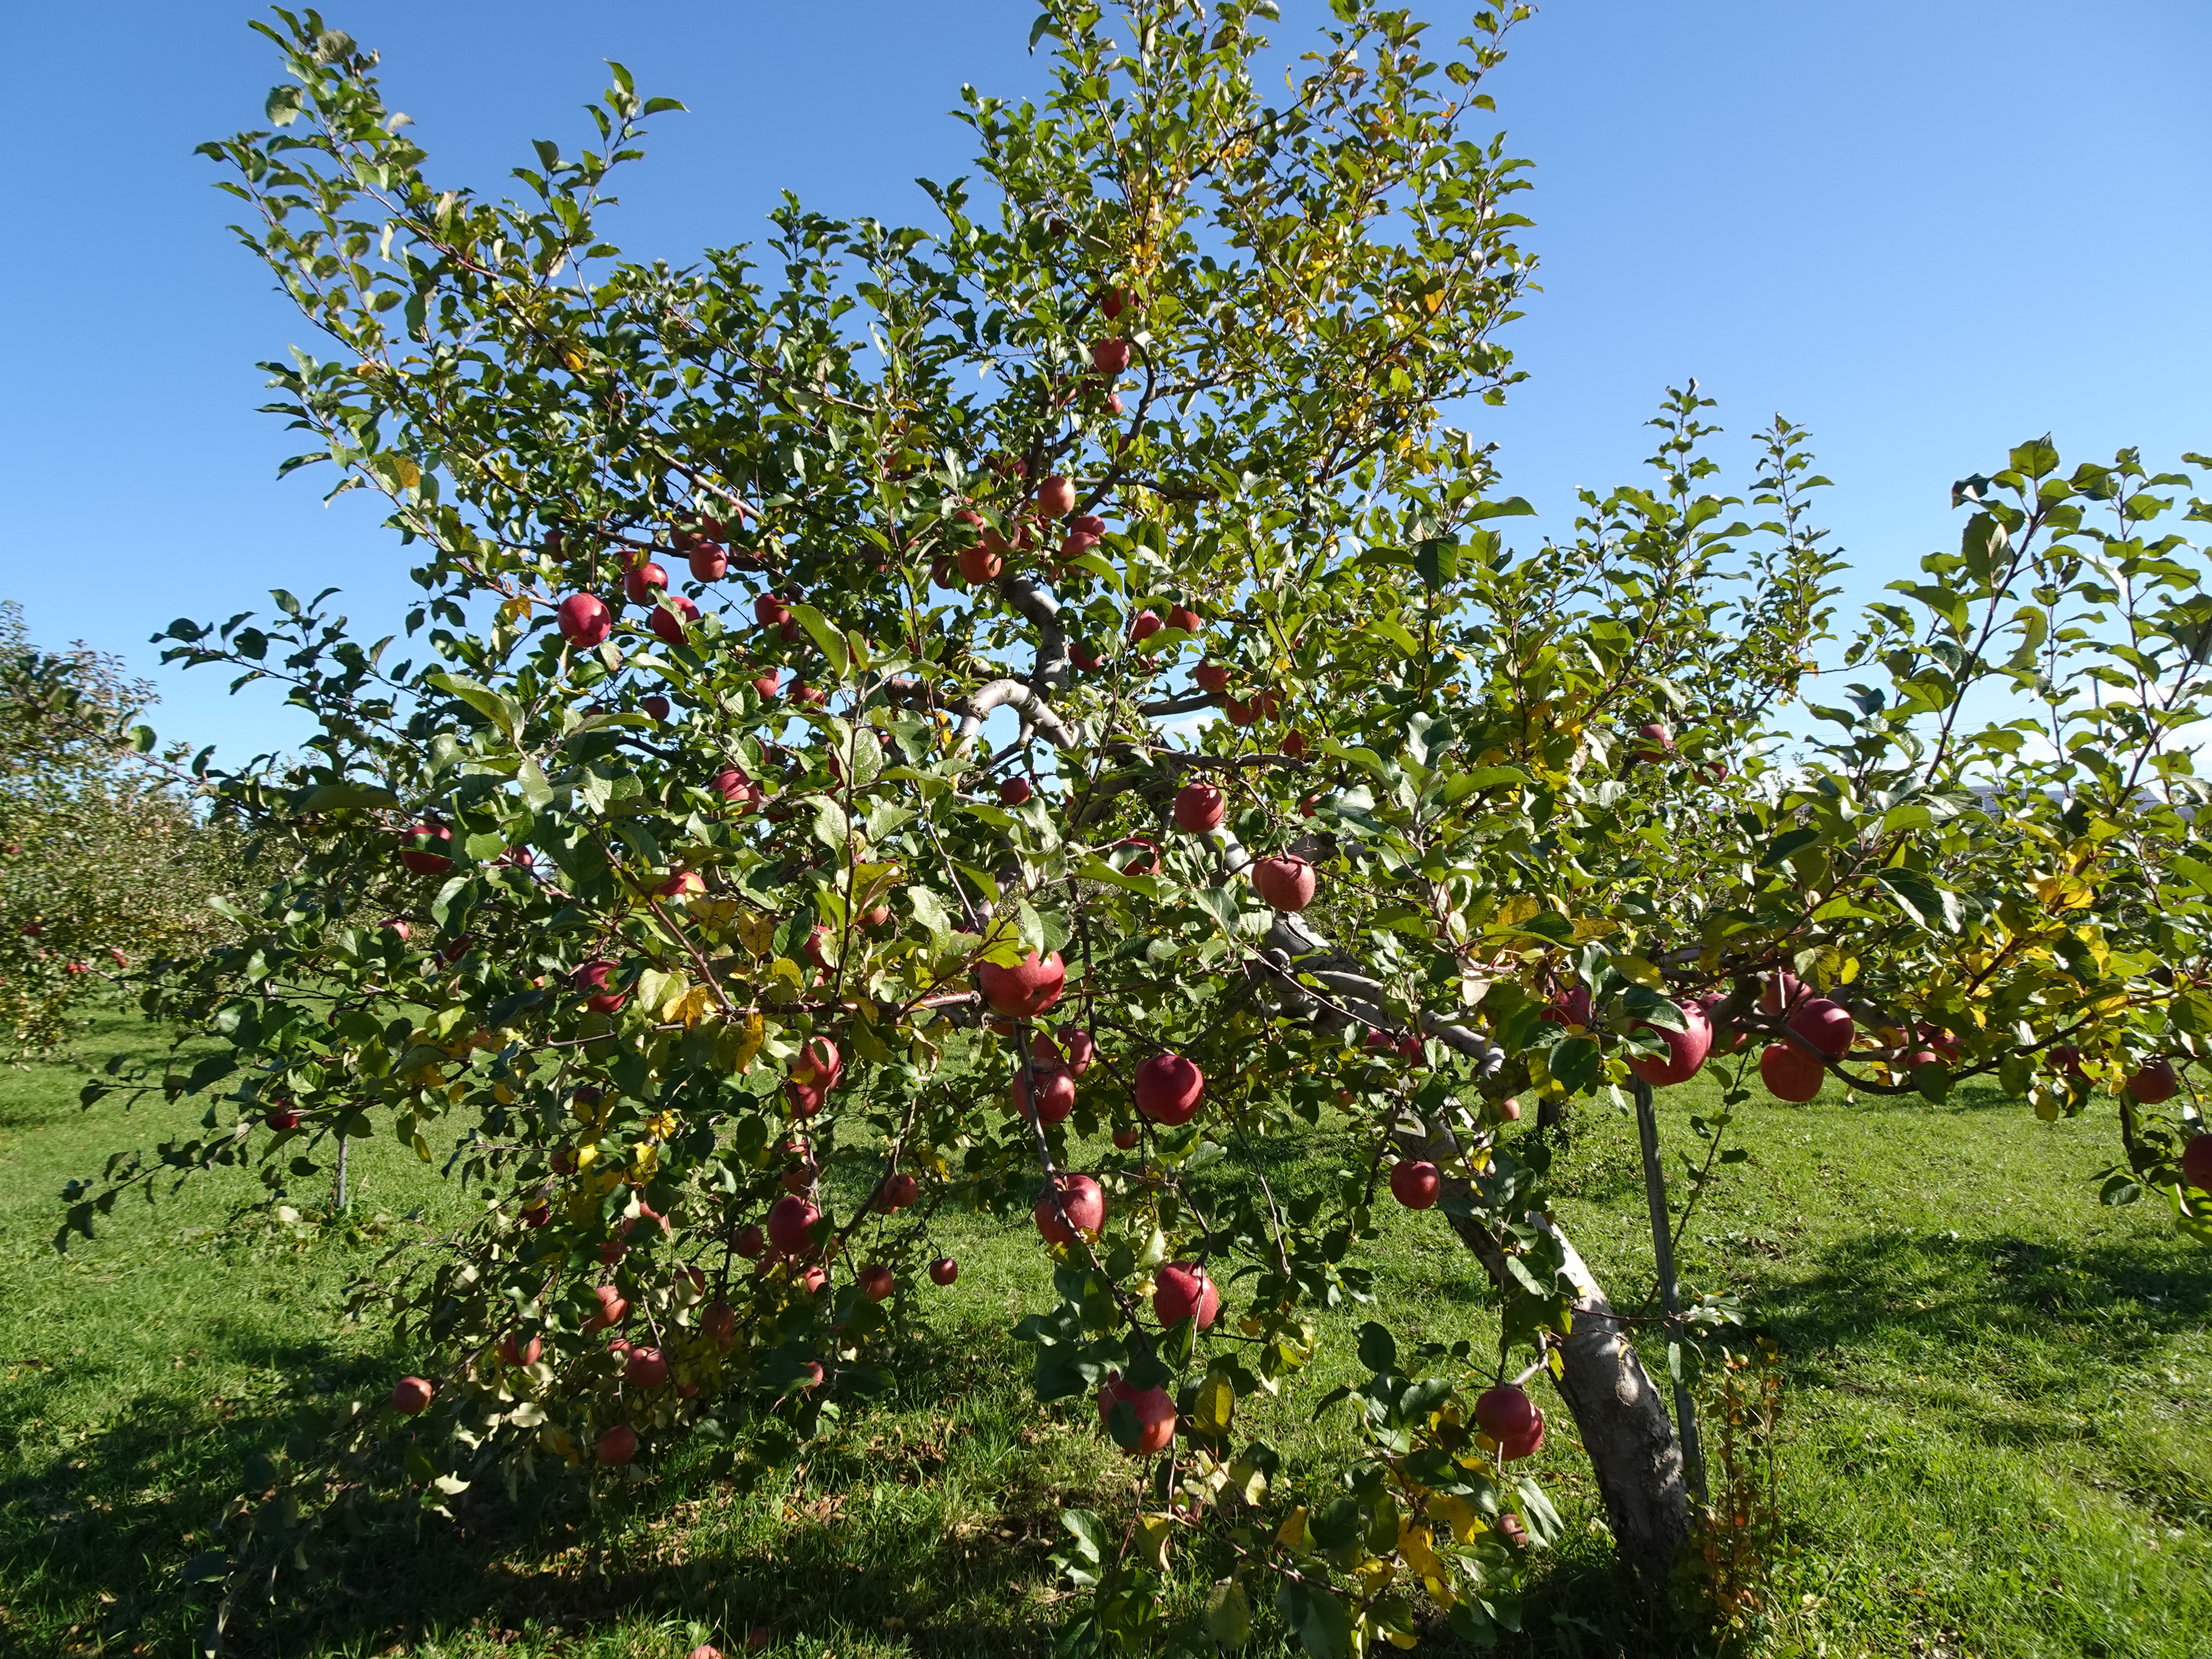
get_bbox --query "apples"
[1080,366,1104,396]
[1070,515,1106,539]
[764,839,786,855]
[783,1081,824,1118]
[2117,447,2139,462]
[579,1285,627,1331]
[418,948,443,972]
[890,423,906,435]
[1016,514,1043,551]
[953,512,984,535]
[780,617,800,643]
[746,666,779,700]
[1101,284,1135,322]
[1493,1400,1544,1461]
[1131,610,1161,643]
[1883,1031,1936,1067]
[1034,1028,1092,1079]
[378,919,409,941]
[629,978,641,995]
[1001,777,1030,807]
[1952,482,1979,509]
[1784,999,1855,1067]
[879,443,898,467]
[729,533,761,572]
[1061,532,1101,576]
[1112,1126,1138,1150]
[1023,499,1051,528]
[929,1258,957,1286]
[596,1425,636,1466]
[766,1196,820,1254]
[626,1347,667,1388]
[999,454,1027,484]
[764,1245,798,1273]
[1135,1054,1204,1126]
[754,1258,778,1284]
[734,1224,764,1258]
[1263,690,1279,722]
[983,520,1020,554]
[877,564,886,573]
[1696,993,1746,1057]
[1050,375,1076,408]
[491,846,533,870]
[855,852,866,863]
[809,1237,839,1262]
[1097,1370,1120,1426]
[860,1264,893,1303]
[445,934,473,963]
[1915,1022,1963,1061]
[1251,856,1275,894]
[1165,601,1201,634]
[549,1144,576,1175]
[979,950,1065,1017]
[880,735,891,745]
[701,1302,734,1339]
[855,904,890,929]
[708,769,759,825]
[1398,1032,1428,1068]
[1672,999,1712,1050]
[643,696,669,722]
[1232,1064,1255,1083]
[1760,1043,1824,1102]
[1035,1175,1107,1248]
[798,1250,817,1263]
[1152,1261,1218,1333]
[803,976,824,1002]
[884,1174,917,1208]
[677,1382,699,1400]
[1390,1160,1439,1210]
[575,961,626,1014]
[612,551,640,587]
[1137,1166,1160,1192]
[658,872,705,926]
[670,514,707,551]
[848,639,870,664]
[782,1156,819,1196]
[1281,729,1308,759]
[1295,638,1303,649]
[779,1140,808,1161]
[652,596,700,645]
[689,542,727,583]
[758,740,770,765]
[1136,654,1160,677]
[264,1100,299,1132]
[573,1086,603,1116]
[765,807,793,824]
[803,1266,826,1293]
[755,593,790,628]
[1069,642,1102,673]
[607,1338,633,1358]
[876,1191,898,1214]
[826,1074,839,1093]
[520,1202,549,1228]
[836,1325,857,1349]
[724,757,739,771]
[1101,394,1121,417]
[1106,1379,1176,1454]
[800,925,834,980]
[786,679,825,714]
[597,1241,625,1265]
[623,1203,669,1237]
[1488,1097,1520,1122]
[503,1333,541,1367]
[952,926,972,934]
[1044,566,1062,586]
[1636,724,1673,764]
[1038,476,1075,519]
[718,1335,735,1353]
[558,593,611,647]
[932,555,952,589]
[970,949,984,973]
[1012,1064,1074,1124]
[1117,837,1160,876]
[1475,1388,1532,1442]
[528,973,546,993]
[1116,434,1128,455]
[1540,986,1594,1032]
[1360,1027,1394,1059]
[2183,1134,2212,1192]
[1300,795,1321,818]
[799,1361,823,1390]
[2049,1046,2080,1066]
[1226,687,1262,727]
[672,1266,705,1296]
[400,824,453,875]
[989,1012,1042,1037]
[1261,855,1316,911]
[1334,1087,1356,1113]
[791,1036,840,1088]
[905,635,921,656]
[2067,1058,2100,1087]
[903,540,920,554]
[1065,794,1087,821]
[1691,758,1728,784]
[2127,1059,2176,1104]
[958,541,1002,585]
[545,530,568,564]
[584,706,603,718]
[702,500,744,543]
[1760,972,1814,1016]
[861,462,876,487]
[1196,658,1231,693]
[1627,1010,1708,1086]
[393,1376,432,1416]
[826,756,845,802]
[1093,336,1130,374]
[1175,783,1225,834]
[625,562,668,606]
